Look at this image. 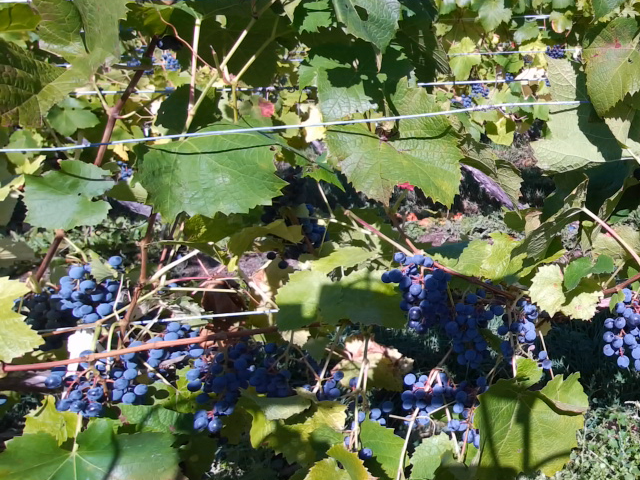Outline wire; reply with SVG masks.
<instances>
[{"mask_svg":"<svg viewBox=\"0 0 640 480\" xmlns=\"http://www.w3.org/2000/svg\"><path fill=\"white\" fill-rule=\"evenodd\" d=\"M542 54L546 55L544 49H526V50H497V51H459L447 54L448 58L461 56H499V55H529Z\"/></svg>","mask_w":640,"mask_h":480,"instance_id":"a009ed1b","label":"wire"},{"mask_svg":"<svg viewBox=\"0 0 640 480\" xmlns=\"http://www.w3.org/2000/svg\"><path fill=\"white\" fill-rule=\"evenodd\" d=\"M99 141H93L90 143L71 144L65 146H46L42 148H2L0 154L4 153H44L49 151H67L73 149H84L99 146Z\"/></svg>","mask_w":640,"mask_h":480,"instance_id":"f0478fcc","label":"wire"},{"mask_svg":"<svg viewBox=\"0 0 640 480\" xmlns=\"http://www.w3.org/2000/svg\"><path fill=\"white\" fill-rule=\"evenodd\" d=\"M595 104H596L595 100H541V101L509 102V103H504V104H499L496 106H489V107H452L450 109H445L437 112H415V113H407V114H394V115L382 116V117L353 119L350 121H347L346 119L328 120L327 123H295V124H286V125H269L267 127H245L240 129H230V130H222V131H196V132H186L184 134L170 133V134H161V135H154V136H142V137H135L130 139L114 140L110 142V145L116 146L121 144H132L137 142L156 141V140L172 139V138L186 139L188 137H198V136H224V135H232V134H242L247 132H269L271 130H288V129H297V128H341L346 126H352L355 124L384 122V121H391L396 119H409V118H417V117H439L447 114H452L454 112H491V111H498L501 109H506L511 107L543 106V105H595Z\"/></svg>","mask_w":640,"mask_h":480,"instance_id":"d2f4af69","label":"wire"},{"mask_svg":"<svg viewBox=\"0 0 640 480\" xmlns=\"http://www.w3.org/2000/svg\"><path fill=\"white\" fill-rule=\"evenodd\" d=\"M519 81H530L529 76H517V77H506V78H495V79H480V80H464L457 82H440V81H419V86H438V87H459L466 85H482V84H497V83H508V82H519Z\"/></svg>","mask_w":640,"mask_h":480,"instance_id":"4f2155b8","label":"wire"},{"mask_svg":"<svg viewBox=\"0 0 640 480\" xmlns=\"http://www.w3.org/2000/svg\"><path fill=\"white\" fill-rule=\"evenodd\" d=\"M283 313V310L281 308H270L269 310H251L248 312H241V313H225V312H219V313H215V314H208V315H203V316H194V315H183V316H177V317H160L157 318L155 320V323H169V324H173L171 322H187V321H206L208 318H218V317H226V316H231V315H252V314H258V315H281Z\"/></svg>","mask_w":640,"mask_h":480,"instance_id":"a73af890","label":"wire"}]
</instances>
